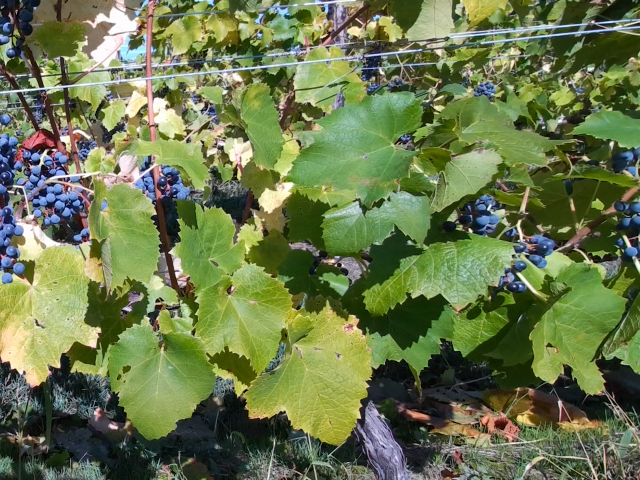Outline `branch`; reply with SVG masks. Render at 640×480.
Masks as SVG:
<instances>
[{"label":"branch","instance_id":"branch-1","mask_svg":"<svg viewBox=\"0 0 640 480\" xmlns=\"http://www.w3.org/2000/svg\"><path fill=\"white\" fill-rule=\"evenodd\" d=\"M159 171H160V168L158 166H155L152 171L153 186L155 191V210L158 218V233H159L160 241L162 242V245L164 247L163 251H164L165 261L168 269L169 282L174 292L177 295H180L182 293V290L176 279L175 267H174L172 252L170 248V242L166 236V231H165V216H164V210L162 207L163 191L159 189V183H158V180L160 178Z\"/></svg>","mask_w":640,"mask_h":480},{"label":"branch","instance_id":"branch-2","mask_svg":"<svg viewBox=\"0 0 640 480\" xmlns=\"http://www.w3.org/2000/svg\"><path fill=\"white\" fill-rule=\"evenodd\" d=\"M70 90H62V100H63V112L65 116V127L69 136L70 141V150L71 157L75 163V172L77 174H81L83 172L82 169V161L78 154L77 147V139L76 134L72 125V114L70 110V98H69Z\"/></svg>","mask_w":640,"mask_h":480},{"label":"branch","instance_id":"branch-3","mask_svg":"<svg viewBox=\"0 0 640 480\" xmlns=\"http://www.w3.org/2000/svg\"><path fill=\"white\" fill-rule=\"evenodd\" d=\"M616 214V210L613 209L612 207H609L607 210L603 211L601 213V215L596 218L593 222H591L590 224L584 226L574 237L573 239L570 241V243L568 245H566L565 247H563L560 250L561 254H564L566 252H568L574 245H578L579 242L582 240L583 236H585L586 234H588L589 232L593 231L598 225L599 223L604 220L609 218L612 215Z\"/></svg>","mask_w":640,"mask_h":480},{"label":"branch","instance_id":"branch-4","mask_svg":"<svg viewBox=\"0 0 640 480\" xmlns=\"http://www.w3.org/2000/svg\"><path fill=\"white\" fill-rule=\"evenodd\" d=\"M47 95H48V91H41L40 100L46 111V115L48 118V122L50 124L51 132L53 134V137L56 143V147L59 148V152H63L65 150V147L63 145V140L59 132L57 122L53 113V109L50 102L48 101Z\"/></svg>","mask_w":640,"mask_h":480},{"label":"branch","instance_id":"branch-5","mask_svg":"<svg viewBox=\"0 0 640 480\" xmlns=\"http://www.w3.org/2000/svg\"><path fill=\"white\" fill-rule=\"evenodd\" d=\"M155 10L154 0H149V9L147 11V58L146 62V76L152 75L151 61H152V13Z\"/></svg>","mask_w":640,"mask_h":480},{"label":"branch","instance_id":"branch-6","mask_svg":"<svg viewBox=\"0 0 640 480\" xmlns=\"http://www.w3.org/2000/svg\"><path fill=\"white\" fill-rule=\"evenodd\" d=\"M146 92H147V100H148V124L150 127V139L155 140L156 136H155V125L153 121V98H152L153 83L151 81L147 82Z\"/></svg>","mask_w":640,"mask_h":480},{"label":"branch","instance_id":"branch-7","mask_svg":"<svg viewBox=\"0 0 640 480\" xmlns=\"http://www.w3.org/2000/svg\"><path fill=\"white\" fill-rule=\"evenodd\" d=\"M24 50H25V53H26V55L28 57V61L31 64L32 70H33V72H34V74L36 76L37 85L38 86H44L45 82H44L43 78L41 77L42 72H41L40 67L38 65V62H37V60L35 58V55H34V53L32 51V48L29 45H26L24 47Z\"/></svg>","mask_w":640,"mask_h":480},{"label":"branch","instance_id":"branch-8","mask_svg":"<svg viewBox=\"0 0 640 480\" xmlns=\"http://www.w3.org/2000/svg\"><path fill=\"white\" fill-rule=\"evenodd\" d=\"M17 98L19 99L23 110L26 112V115H27L28 119L30 120L31 125L33 126V128L35 130H38L40 128V124H39L38 119L36 118L32 108L30 107L26 97L24 95H17Z\"/></svg>","mask_w":640,"mask_h":480},{"label":"branch","instance_id":"branch-9","mask_svg":"<svg viewBox=\"0 0 640 480\" xmlns=\"http://www.w3.org/2000/svg\"><path fill=\"white\" fill-rule=\"evenodd\" d=\"M0 72L4 74V76L9 80L14 89H17L19 87V83L16 77L2 64H0Z\"/></svg>","mask_w":640,"mask_h":480},{"label":"branch","instance_id":"branch-10","mask_svg":"<svg viewBox=\"0 0 640 480\" xmlns=\"http://www.w3.org/2000/svg\"><path fill=\"white\" fill-rule=\"evenodd\" d=\"M524 215H525V217H526V218H528V219L532 222V224L537 228V230H538L540 233H542L545 237H549V236H550V233H549L548 231H546V230H545V229H544V228H543V227L538 223V221L536 220V218H535V217H533V216L530 214V212H529V211H525V212H524Z\"/></svg>","mask_w":640,"mask_h":480}]
</instances>
